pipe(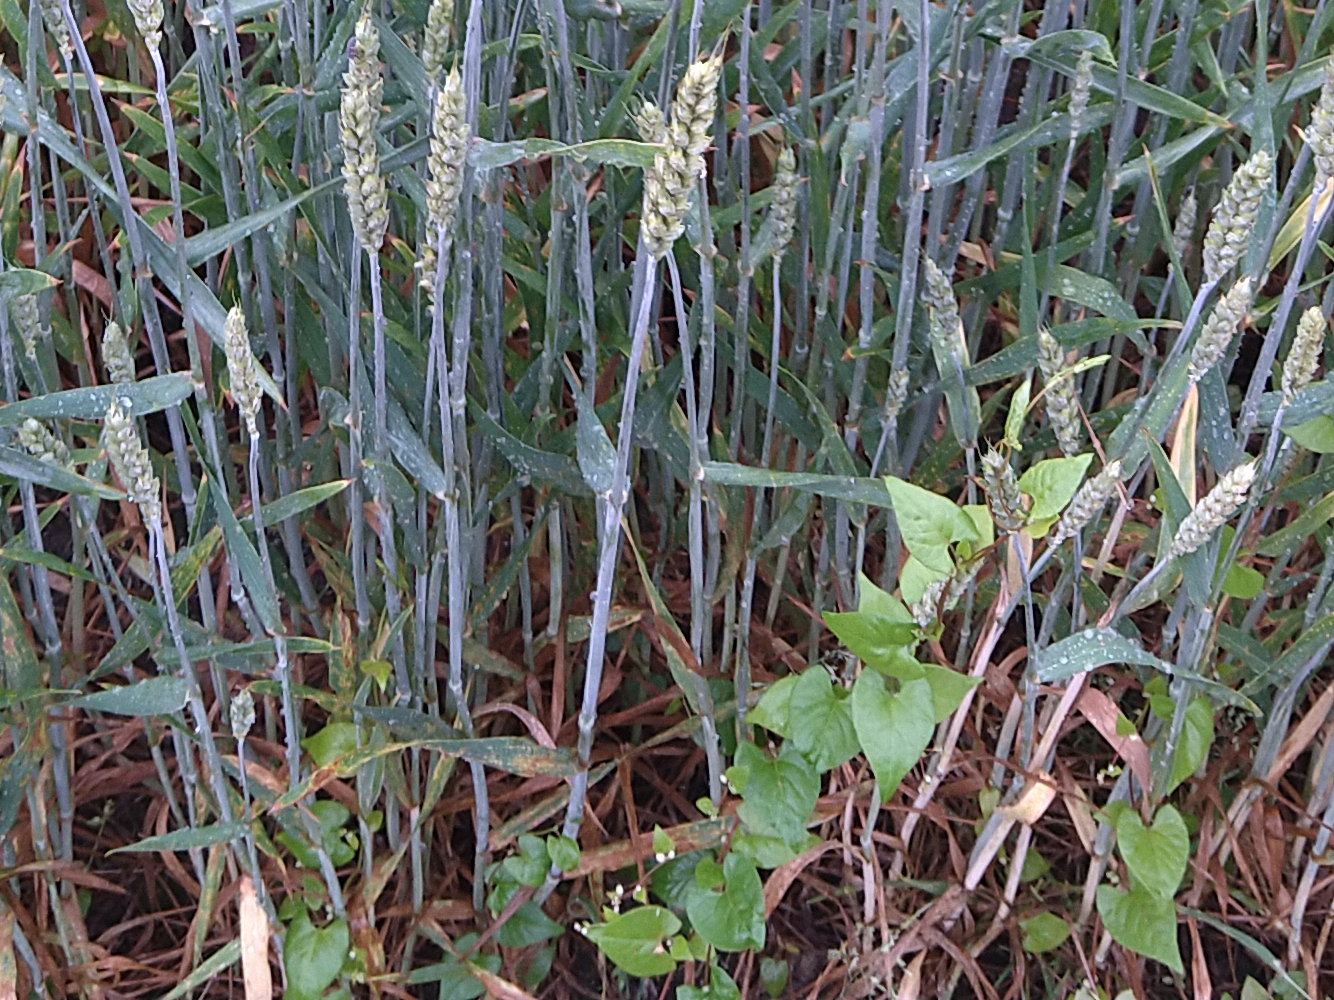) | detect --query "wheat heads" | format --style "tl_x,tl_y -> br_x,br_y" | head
12,292 -> 40,357
1053,465 -> 1121,545
102,406 -> 159,524
423,0 -> 455,78
18,419 -> 74,473
1312,6 -> 1334,147
629,101 -> 669,151
340,23 -> 389,246
1284,308 -> 1327,393
922,257 -> 967,375
1174,192 -> 1198,263
1070,52 -> 1092,139
22,0 -> 67,51
421,69 -> 470,298
225,309 -> 260,425
981,453 -> 1031,532
103,322 -> 135,390
1038,333 -> 1085,455
1190,281 -> 1255,377
1170,465 -> 1257,559
641,61 -> 723,252
1204,153 -> 1275,285
887,366 -> 908,426
768,149 -> 797,256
